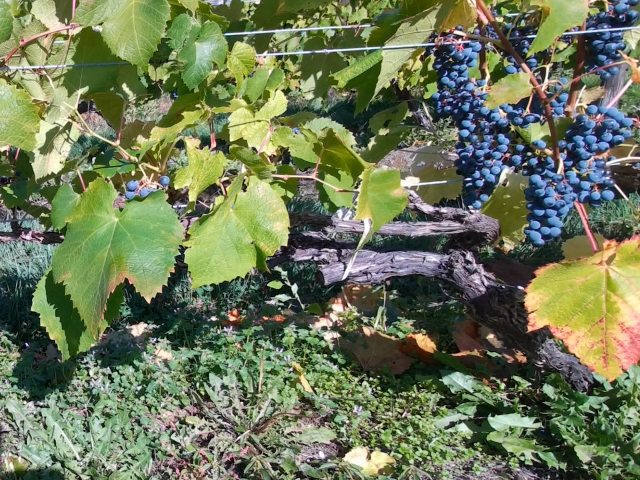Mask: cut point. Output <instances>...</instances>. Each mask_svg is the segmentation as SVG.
<instances>
[{"label":"cut point","mask_w":640,"mask_h":480,"mask_svg":"<svg viewBox=\"0 0 640 480\" xmlns=\"http://www.w3.org/2000/svg\"><path fill=\"white\" fill-rule=\"evenodd\" d=\"M535 93H536V91H535V89H533V90H532V92H531V94H530L529 101H528V103H527V105H526V108H530V106H531V104H532V100H533V97H534Z\"/></svg>","instance_id":"1"}]
</instances>
